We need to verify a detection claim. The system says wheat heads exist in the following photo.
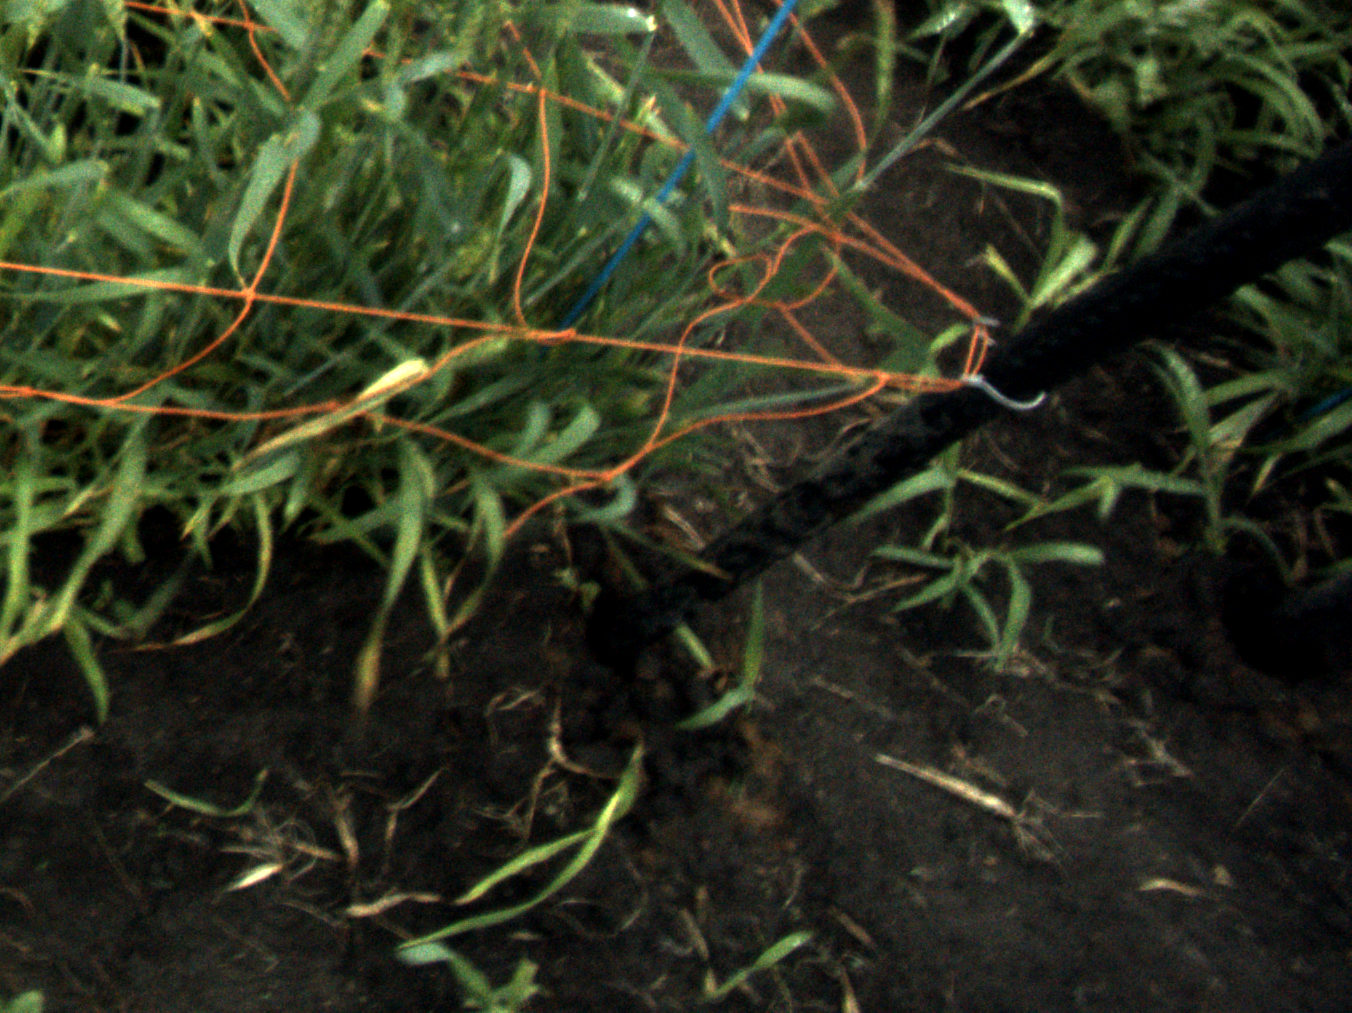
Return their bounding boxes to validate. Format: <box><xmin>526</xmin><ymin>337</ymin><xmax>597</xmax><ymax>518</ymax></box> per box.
<box><xmin>451</xmin><ymin>229</ymin><xmax>490</xmax><ymax>279</ymax></box>
<box><xmin>316</xmin><ymin>0</ymin><xmax>362</xmax><ymax>63</ymax></box>
<box><xmin>438</xmin><ymin>335</ymin><xmax>506</xmax><ymax>376</ymax></box>
<box><xmin>377</xmin><ymin>22</ymin><xmax>410</xmax><ymax>99</ymax></box>
<box><xmin>875</xmin><ymin>14</ymin><xmax>897</xmax><ymax>96</ymax></box>
<box><xmin>24</xmin><ymin>0</ymin><xmax>63</xmax><ymax>47</ymax></box>
<box><xmin>445</xmin><ymin>0</ymin><xmax>492</xmax><ymax>76</ymax></box>
<box><xmin>87</xmin><ymin>0</ymin><xmax>130</xmax><ymax>33</ymax></box>
<box><xmin>96</xmin><ymin>0</ymin><xmax>140</xmax><ymax>43</ymax></box>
